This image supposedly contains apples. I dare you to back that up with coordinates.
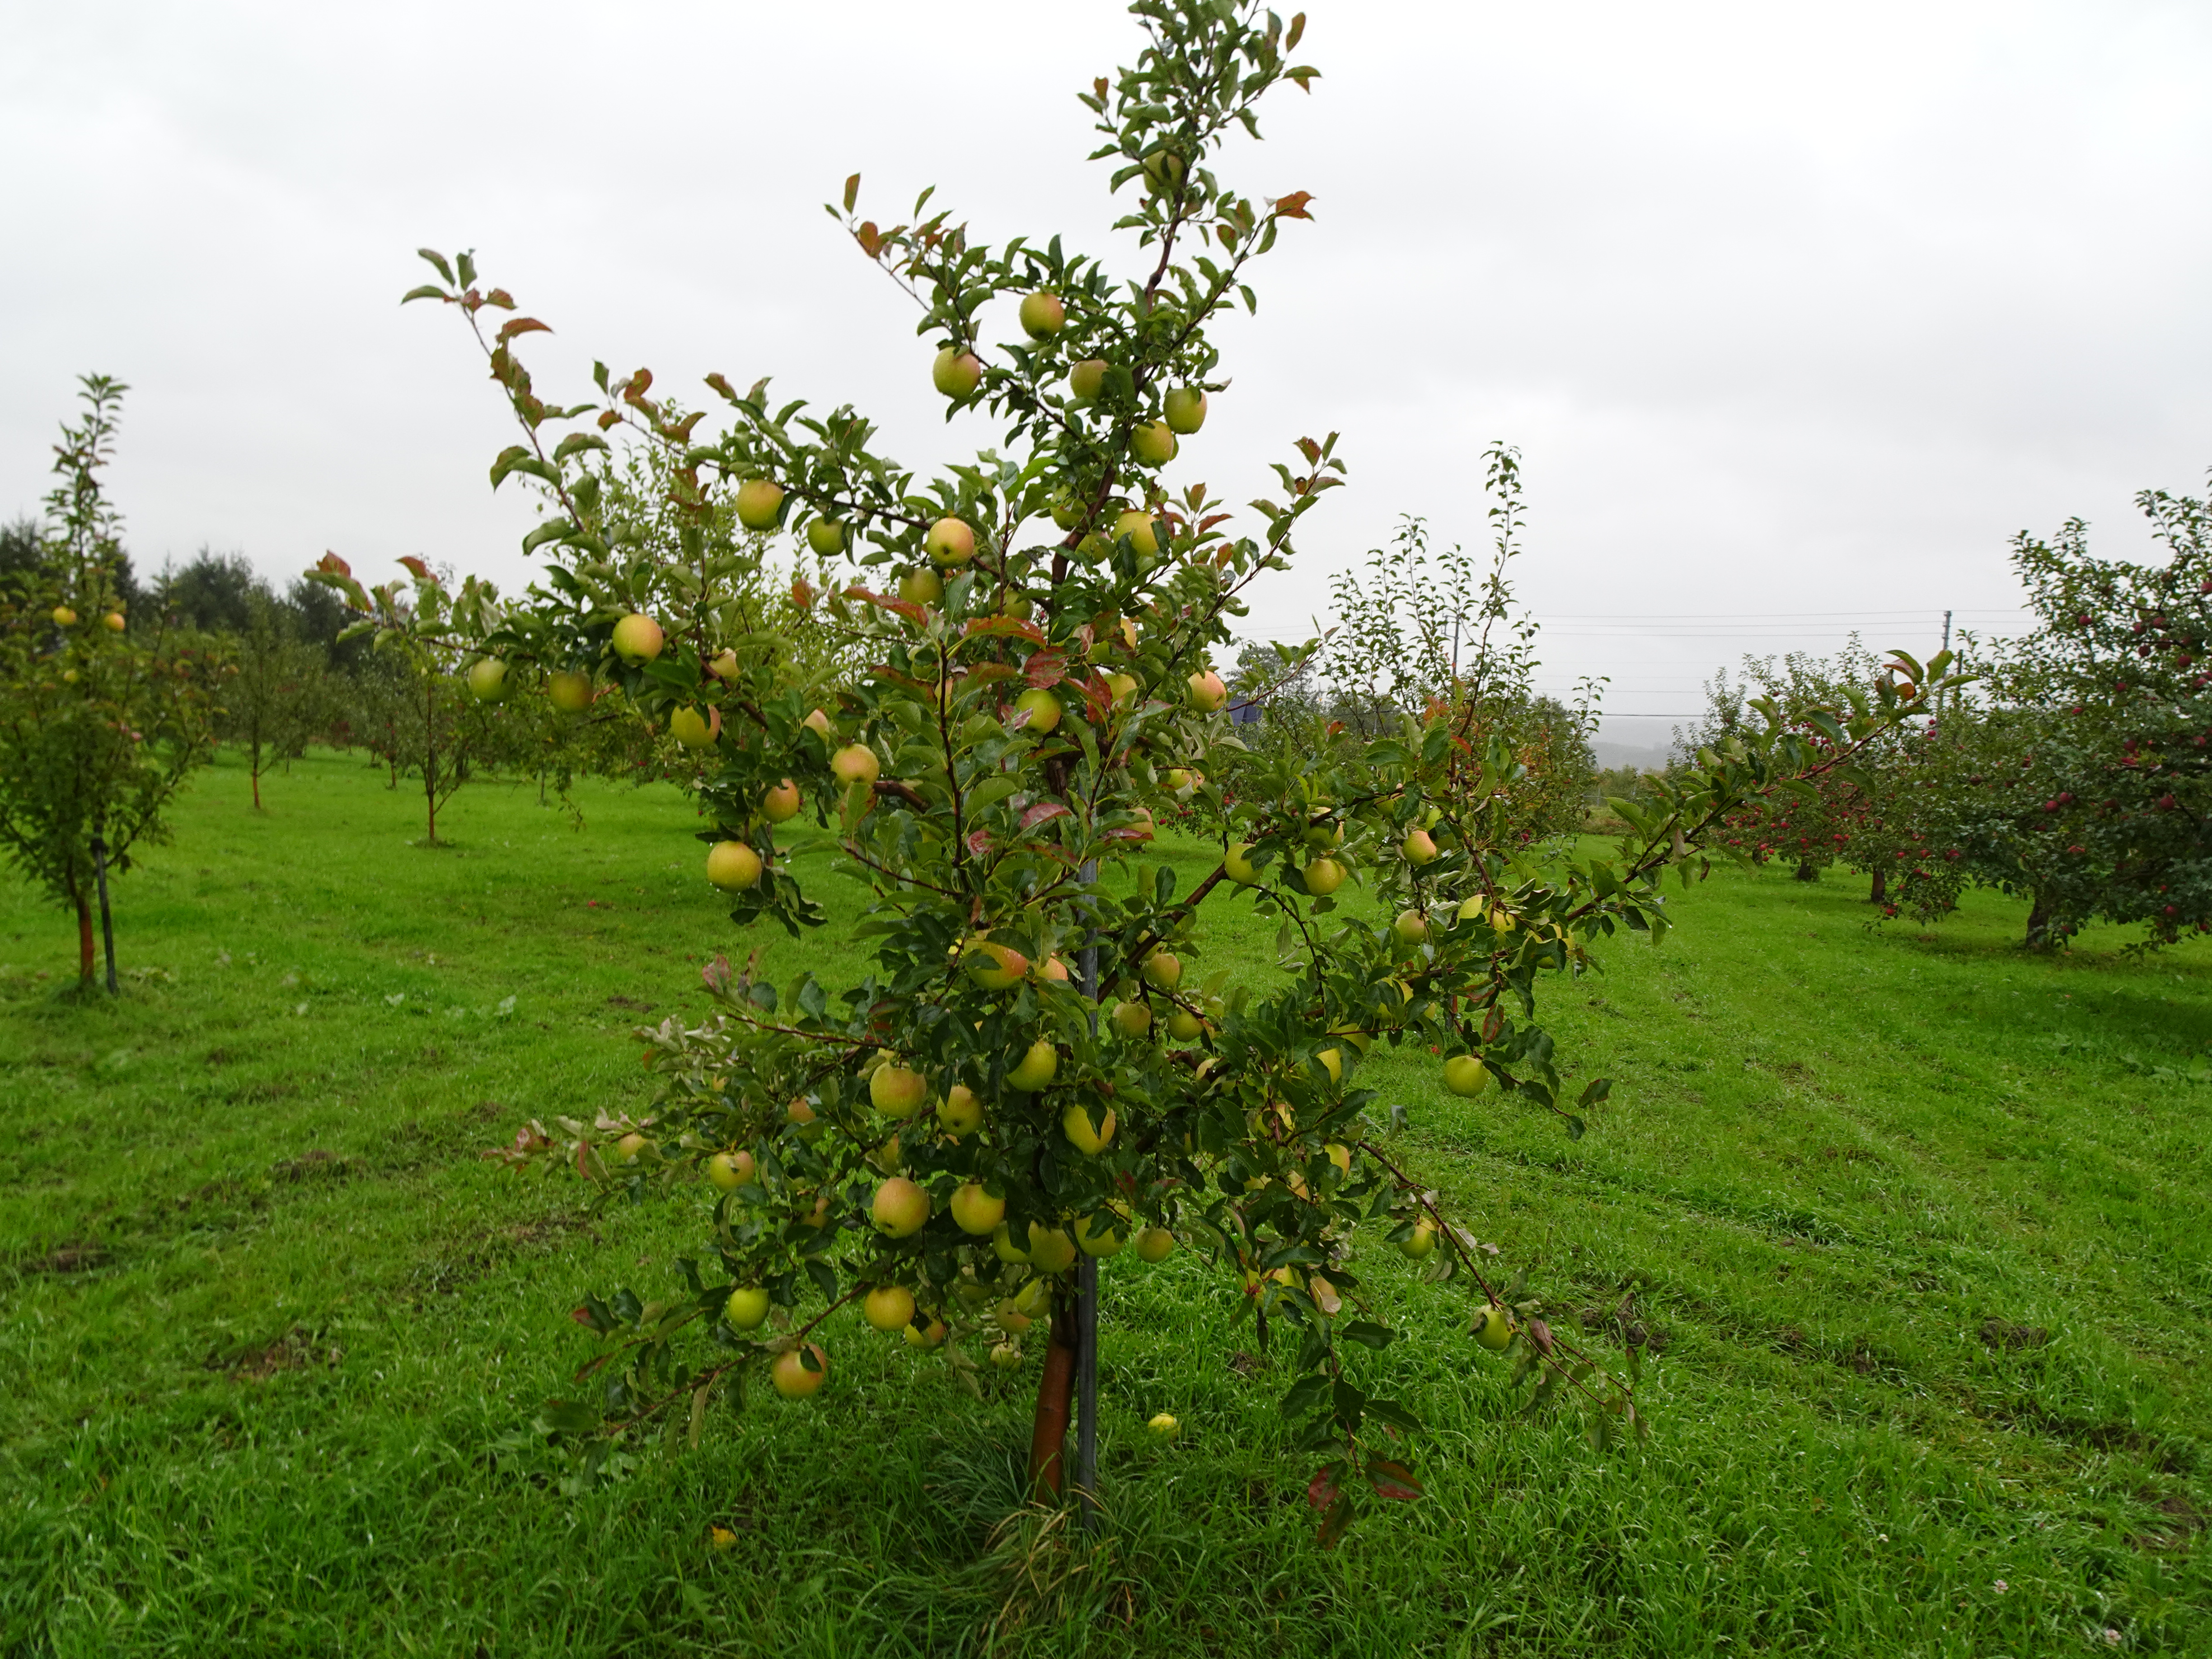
[709,1149,755,1194]
[1128,419,1174,468]
[995,1297,1031,1333]
[1014,1279,1052,1319]
[707,840,761,894]
[831,743,880,793]
[1456,894,1516,946]
[1244,1263,1302,1313]
[1074,1198,1132,1258]
[808,516,850,556]
[1070,359,1111,401]
[1102,673,1138,703]
[1033,1226,1076,1274]
[1142,952,1180,990]
[988,585,1033,622]
[1076,530,1111,565]
[1473,1303,1516,1350]
[797,1190,830,1230]
[468,657,518,704]
[1143,150,1183,195]
[708,1058,734,1095]
[1029,951,1068,1004]
[1112,1003,1151,1036]
[927,517,975,568]
[934,678,953,712]
[736,479,784,531]
[872,1177,929,1239]
[1254,1170,1308,1200]
[1375,783,1406,815]
[963,929,1029,991]
[1527,923,1574,969]
[1302,857,1341,896]
[1302,807,1344,848]
[801,709,829,748]
[1425,806,1471,850]
[772,1343,826,1397]
[870,1061,927,1119]
[863,1284,915,1332]
[1091,619,1137,665]
[1332,860,1347,884]
[1113,510,1160,557]
[951,1180,1005,1236]
[1168,1003,1204,1042]
[670,701,721,749]
[878,1133,901,1172]
[1163,388,1207,434]
[1186,670,1226,713]
[933,346,981,400]
[728,1286,769,1331]
[936,1084,984,1137]
[1121,926,1156,960]
[787,1096,816,1128]
[1322,1143,1351,1183]
[1397,1216,1436,1260]
[1196,1058,1236,1096]
[619,1134,653,1163]
[1395,909,1433,947]
[1135,1223,1173,1263]
[1375,977,1414,1020]
[1443,1055,1488,1098]
[990,1342,1022,1371]
[1124,807,1153,847]
[549,672,594,714]
[1003,1038,1057,1092]
[1168,766,1192,789]
[1015,688,1061,735]
[1020,292,1066,341]
[993,1219,1041,1264]
[1402,1002,1436,1031]
[613,614,664,666]
[1316,1048,1342,1085]
[1050,484,1088,531]
[901,566,946,604]
[705,645,741,677]
[1402,830,1437,866]
[757,778,800,824]
[1224,843,1264,885]
[1255,1104,1295,1142]
[904,1320,943,1349]
[1061,1103,1116,1156]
